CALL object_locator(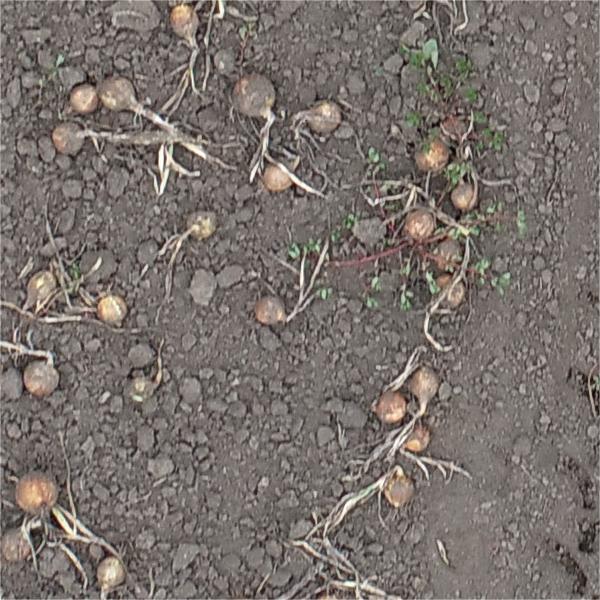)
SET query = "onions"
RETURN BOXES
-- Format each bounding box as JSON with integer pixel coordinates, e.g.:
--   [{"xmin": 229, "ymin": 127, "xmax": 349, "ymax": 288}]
[
  {"xmin": 408, "ymin": 368, "xmax": 439, "ymax": 407},
  {"xmin": 50, "ymin": 122, "xmax": 83, "ymax": 153},
  {"xmin": 230, "ymin": 74, "xmax": 275, "ymax": 116},
  {"xmin": 14, "ymin": 475, "xmax": 55, "ymax": 510},
  {"xmin": 413, "ymin": 138, "xmax": 447, "ymax": 171},
  {"xmin": 305, "ymin": 98, "xmax": 336, "ymax": 132},
  {"xmin": 449, "ymin": 180, "xmax": 477, "ymax": 208},
  {"xmin": 253, "ymin": 294, "xmax": 285, "ymax": 325},
  {"xmin": 99, "ymin": 75, "xmax": 133, "ymax": 110},
  {"xmin": 440, "ymin": 273, "xmax": 466, "ymax": 310},
  {"xmin": 21, "ymin": 360, "xmax": 55, "ymax": 396},
  {"xmin": 439, "ymin": 114, "xmax": 465, "ymax": 141},
  {"xmin": 94, "ymin": 293, "xmax": 126, "ymax": 324},
  {"xmin": 188, "ymin": 213, "xmax": 214, "ymax": 238},
  {"xmin": 404, "ymin": 425, "xmax": 430, "ymax": 450},
  {"xmin": 404, "ymin": 209, "xmax": 434, "ymax": 240},
  {"xmin": 261, "ymin": 163, "xmax": 292, "ymax": 192},
  {"xmin": 26, "ymin": 270, "xmax": 57, "ymax": 309},
  {"xmin": 381, "ymin": 471, "xmax": 414, "ymax": 505},
  {"xmin": 126, "ymin": 379, "xmax": 152, "ymax": 407},
  {"xmin": 1, "ymin": 530, "xmax": 28, "ymax": 562},
  {"xmin": 95, "ymin": 558, "xmax": 125, "ymax": 587},
  {"xmin": 373, "ymin": 389, "xmax": 406, "ymax": 423},
  {"xmin": 166, "ymin": 4, "xmax": 197, "ymax": 34},
  {"xmin": 69, "ymin": 82, "xmax": 98, "ymax": 112}
]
